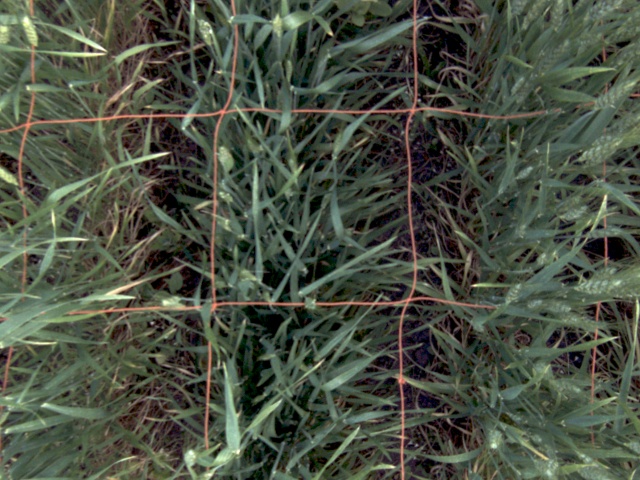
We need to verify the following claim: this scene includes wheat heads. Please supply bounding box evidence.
[271,18,284,36]
[616,5,640,37]
[219,189,233,206]
[585,0,615,20]
[220,145,235,171]
[21,14,40,47]
[518,74,536,102]
[589,267,615,278]
[239,264,256,282]
[598,81,629,110]
[283,58,296,88]
[513,166,533,180]
[548,297,571,315]
[505,283,521,302]
[575,140,615,165]
[505,411,525,425]
[158,294,178,310]
[552,378,582,394]
[526,299,549,306]
[487,430,500,448]
[553,0,561,29]
[1,167,19,184]
[518,0,546,30]
[545,461,563,475]
[575,450,599,469]
[197,21,215,45]
[0,28,15,44]
[576,280,618,291]
[560,208,584,221]
[552,194,578,210]
[181,450,198,471]
[539,43,564,72]
[582,227,618,239]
